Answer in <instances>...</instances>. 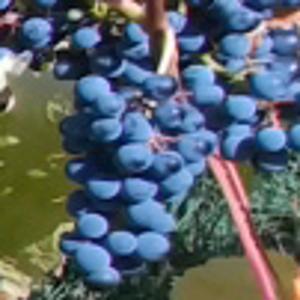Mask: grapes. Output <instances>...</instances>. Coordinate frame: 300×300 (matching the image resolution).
<instances>
[{
  "label": "grapes",
  "mask_w": 300,
  "mask_h": 300,
  "mask_svg": "<svg viewBox=\"0 0 300 300\" xmlns=\"http://www.w3.org/2000/svg\"><path fill=\"white\" fill-rule=\"evenodd\" d=\"M210 24L193 30L182 12L166 10L180 47V78L157 74L148 26L132 22L125 41H105L95 27L74 32L75 53L55 59L50 74L73 79L76 117L61 121L64 177L82 190L67 198L73 230L59 248L73 254L83 281L116 292L124 272L113 257L133 253L161 262L173 252V219L161 200L187 195L212 156L253 161L266 173H283L300 156V121L261 127L263 113L244 93H231L225 76L202 64L209 54L229 73L250 69L243 32L270 17L298 12L299 0H190Z\"/></svg>",
  "instance_id": "01657485"
},
{
  "label": "grapes",
  "mask_w": 300,
  "mask_h": 300,
  "mask_svg": "<svg viewBox=\"0 0 300 300\" xmlns=\"http://www.w3.org/2000/svg\"><path fill=\"white\" fill-rule=\"evenodd\" d=\"M300 25L270 29L253 47L259 70L246 77L249 92L265 102L300 100Z\"/></svg>",
  "instance_id": "b958b902"
},
{
  "label": "grapes",
  "mask_w": 300,
  "mask_h": 300,
  "mask_svg": "<svg viewBox=\"0 0 300 300\" xmlns=\"http://www.w3.org/2000/svg\"><path fill=\"white\" fill-rule=\"evenodd\" d=\"M19 38L25 51L40 54L48 49L53 40L54 26L41 16L28 18L19 28Z\"/></svg>",
  "instance_id": "0513c4c2"
}]
</instances>
